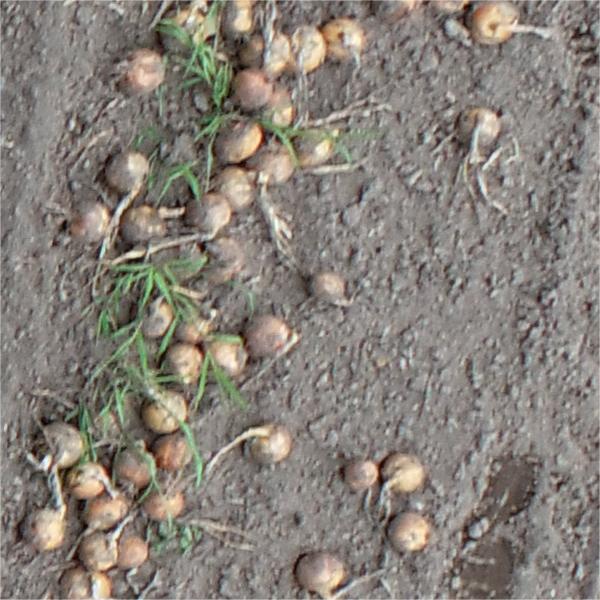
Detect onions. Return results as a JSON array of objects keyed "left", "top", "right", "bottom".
[
  {"left": 429, "top": 0, "right": 471, "bottom": 10},
  {"left": 218, "top": 121, "right": 262, "bottom": 163},
  {"left": 252, "top": 147, "right": 294, "bottom": 186},
  {"left": 290, "top": 28, "right": 326, "bottom": 71},
  {"left": 202, "top": 235, "right": 246, "bottom": 282},
  {"left": 163, "top": 342, "right": 202, "bottom": 382},
  {"left": 460, "top": 108, "right": 499, "bottom": 151},
  {"left": 245, "top": 35, "right": 288, "bottom": 75},
  {"left": 341, "top": 457, "right": 376, "bottom": 491},
  {"left": 76, "top": 530, "right": 115, "bottom": 569},
  {"left": 295, "top": 549, "right": 345, "bottom": 590},
  {"left": 468, "top": 3, "right": 517, "bottom": 44},
  {"left": 379, "top": 452, "right": 422, "bottom": 493},
  {"left": 207, "top": 335, "right": 245, "bottom": 375},
  {"left": 42, "top": 421, "right": 83, "bottom": 466},
  {"left": 162, "top": 10, "right": 206, "bottom": 48},
  {"left": 259, "top": 92, "right": 296, "bottom": 130},
  {"left": 319, "top": 18, "right": 366, "bottom": 59},
  {"left": 150, "top": 434, "right": 188, "bottom": 472},
  {"left": 248, "top": 312, "right": 295, "bottom": 360},
  {"left": 112, "top": 533, "right": 148, "bottom": 568},
  {"left": 86, "top": 491, "right": 126, "bottom": 529},
  {"left": 117, "top": 49, "right": 161, "bottom": 96},
  {"left": 69, "top": 463, "right": 108, "bottom": 501},
  {"left": 141, "top": 393, "right": 185, "bottom": 433},
  {"left": 63, "top": 571, "right": 109, "bottom": 599},
  {"left": 226, "top": 0, "right": 256, "bottom": 35},
  {"left": 23, "top": 506, "right": 68, "bottom": 553},
  {"left": 113, "top": 447, "right": 153, "bottom": 492},
  {"left": 189, "top": 193, "right": 232, "bottom": 236},
  {"left": 144, "top": 488, "right": 183, "bottom": 520},
  {"left": 215, "top": 166, "right": 252, "bottom": 206},
  {"left": 139, "top": 302, "right": 172, "bottom": 338},
  {"left": 375, "top": 0, "right": 419, "bottom": 24},
  {"left": 305, "top": 131, "right": 334, "bottom": 162},
  {"left": 158, "top": 234, "right": 202, "bottom": 275},
  {"left": 245, "top": 422, "right": 289, "bottom": 464},
  {"left": 70, "top": 203, "right": 106, "bottom": 240},
  {"left": 310, "top": 267, "right": 345, "bottom": 304},
  {"left": 386, "top": 510, "right": 428, "bottom": 552},
  {"left": 120, "top": 204, "right": 163, "bottom": 245},
  {"left": 231, "top": 69, "right": 271, "bottom": 111},
  {"left": 104, "top": 149, "right": 148, "bottom": 192},
  {"left": 176, "top": 312, "right": 212, "bottom": 344}
]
